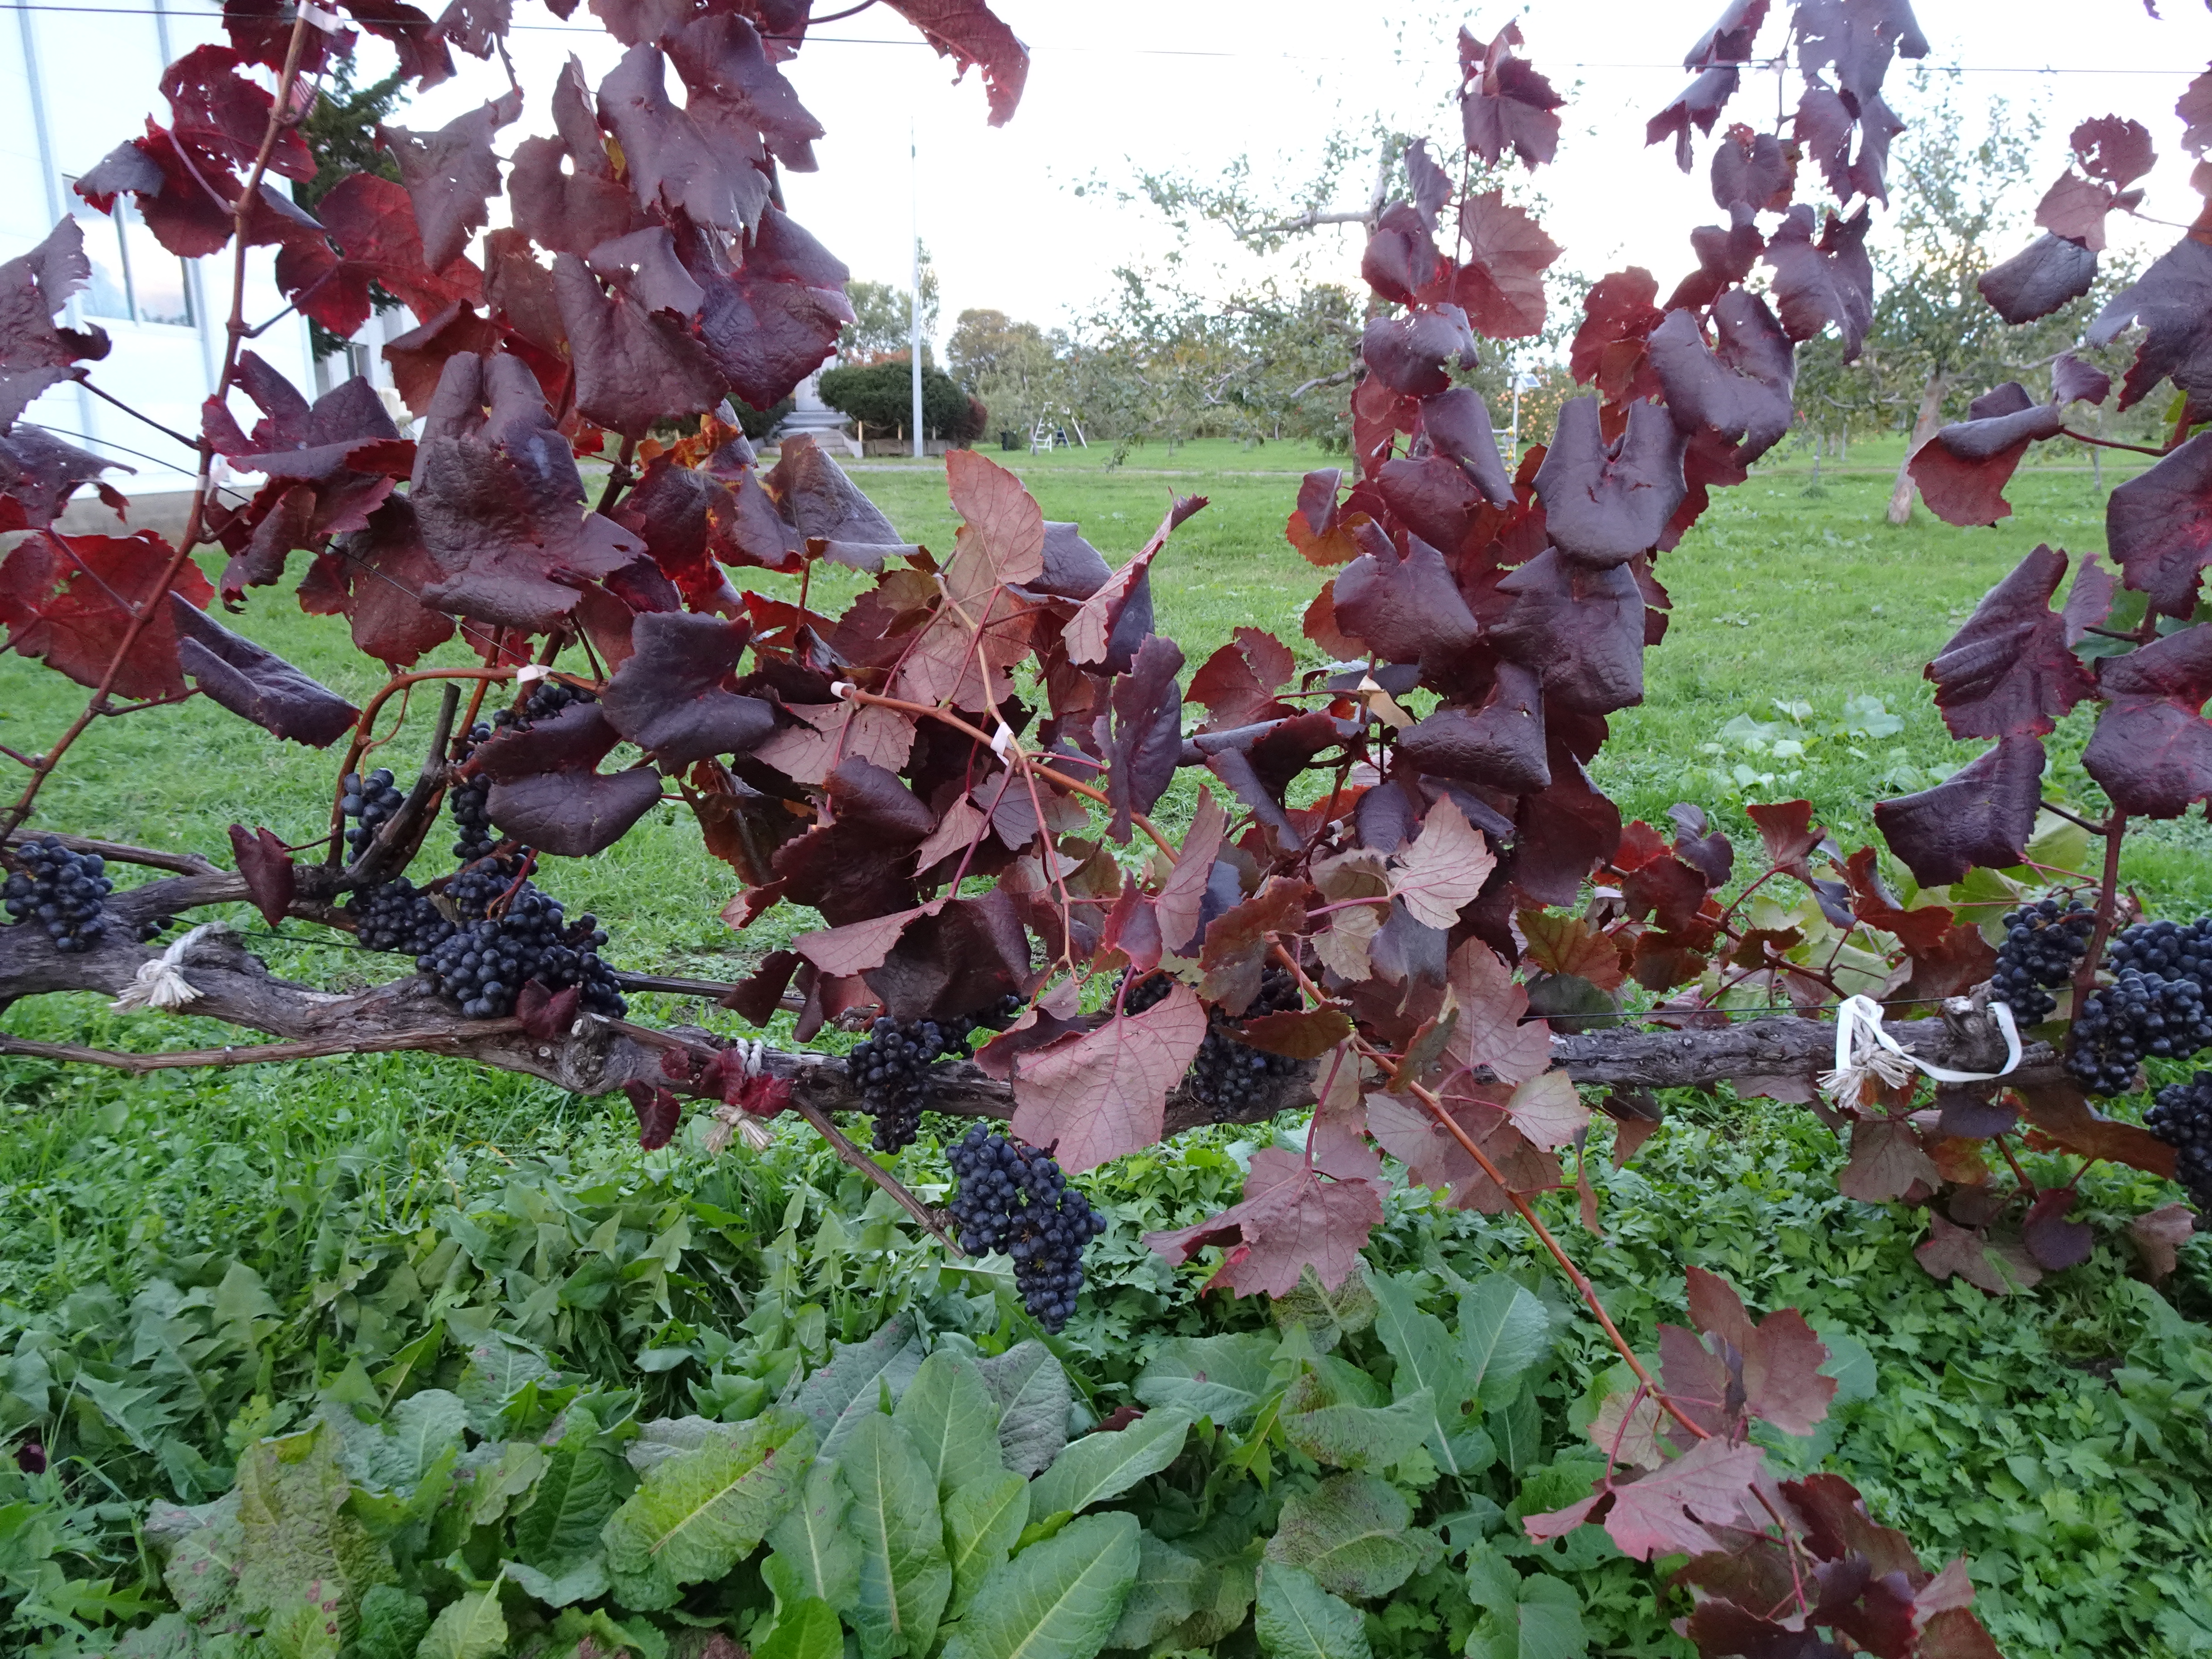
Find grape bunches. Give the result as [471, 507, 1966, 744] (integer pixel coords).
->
[2, 834, 114, 955]
[940, 991, 1023, 1059]
[454, 718, 491, 776]
[873, 1068, 926, 1162]
[2104, 915, 2212, 1014]
[1205, 962, 1308, 1028]
[943, 1125, 1065, 1256]
[501, 885, 569, 998]
[844, 1009, 943, 1113]
[2141, 1064, 2212, 1232]
[540, 911, 639, 1022]
[1986, 896, 2097, 1031]
[2062, 969, 2210, 1095]
[1191, 1020, 1305, 1125]
[417, 930, 528, 1022]
[496, 837, 545, 877]
[441, 857, 511, 931]
[494, 685, 595, 747]
[136, 910, 180, 947]
[451, 778, 494, 861]
[1110, 958, 1187, 1034]
[340, 765, 408, 865]
[343, 873, 453, 955]
[1010, 1194, 1108, 1338]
